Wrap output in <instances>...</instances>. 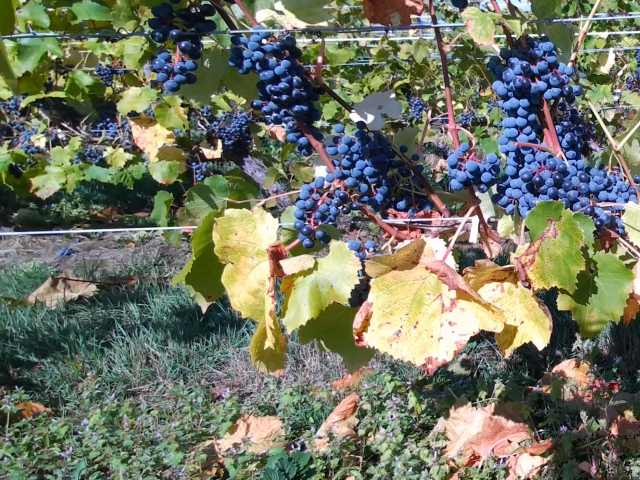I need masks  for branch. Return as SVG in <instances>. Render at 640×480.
<instances>
[{
    "label": "branch",
    "mask_w": 640,
    "mask_h": 480,
    "mask_svg": "<svg viewBox=\"0 0 640 480\" xmlns=\"http://www.w3.org/2000/svg\"><path fill=\"white\" fill-rule=\"evenodd\" d=\"M434 33L442 67V77L444 82V102L450 118V120L448 121V132L452 140L453 147L455 149H458L460 147V140L457 136V134L459 133V125L457 122V116L453 106V102L451 100V80L449 75L450 68L447 59L446 47L443 42L441 29L435 28Z\"/></svg>",
    "instance_id": "30e6481e"
},
{
    "label": "branch",
    "mask_w": 640,
    "mask_h": 480,
    "mask_svg": "<svg viewBox=\"0 0 640 480\" xmlns=\"http://www.w3.org/2000/svg\"><path fill=\"white\" fill-rule=\"evenodd\" d=\"M559 104L560 99L558 97H555L552 101L550 111L549 104L547 102H544L542 104V110L538 109L536 111L540 127L543 131L540 137V142L542 144H545L547 142L548 147L552 149L551 153L553 155H557L561 151V146L559 145V139L553 121L558 111Z\"/></svg>",
    "instance_id": "325d2c04"
},
{
    "label": "branch",
    "mask_w": 640,
    "mask_h": 480,
    "mask_svg": "<svg viewBox=\"0 0 640 480\" xmlns=\"http://www.w3.org/2000/svg\"><path fill=\"white\" fill-rule=\"evenodd\" d=\"M584 101H585V102L589 105V107L591 108L592 113H593V115H594V117H595V119H596V121H597V123H598V126H599V127L601 128V130L604 132V134H605V136H606V138H607V140H608V142H609V144H610V146H611L612 150L614 151L615 156L620 160V162H621V164H622V166H623V168H624V171L626 172V175H627V176H628V178L630 179V180H629V184H630L631 186H635V185H636V182H634V181H633V177H634V175H633V173L631 172V170H630V168H629V166H628V164H627V162H626V160H625V157H624V156H622V154L619 152V149H618V147H617V145H616L615 141L613 140L612 135L610 134L609 130L607 129V127H606V126H605V124L603 123V121H602V119H601V116L599 115L598 110H597V108H596V106H595L594 102H593L589 97H585V98H584Z\"/></svg>",
    "instance_id": "170604dd"
},
{
    "label": "branch",
    "mask_w": 640,
    "mask_h": 480,
    "mask_svg": "<svg viewBox=\"0 0 640 480\" xmlns=\"http://www.w3.org/2000/svg\"><path fill=\"white\" fill-rule=\"evenodd\" d=\"M469 191V197L472 201V204L474 206V211H475V215L478 218L481 227L484 231V233L491 239V240H495L497 243H501L503 241V238L498 235L497 233H494L490 227L489 224L486 220V217L484 216L482 209H481V203L479 202V199L477 197L476 194V188L474 186H470L468 188Z\"/></svg>",
    "instance_id": "45aa463d"
},
{
    "label": "branch",
    "mask_w": 640,
    "mask_h": 480,
    "mask_svg": "<svg viewBox=\"0 0 640 480\" xmlns=\"http://www.w3.org/2000/svg\"><path fill=\"white\" fill-rule=\"evenodd\" d=\"M413 176H419L422 179V183H420V187L423 188L429 196L431 202L438 208L440 213L444 217H450L451 212L449 208L444 204L440 196L434 191L429 182L426 180V177L421 173H416L415 169H412Z\"/></svg>",
    "instance_id": "982ccf7c"
},
{
    "label": "branch",
    "mask_w": 640,
    "mask_h": 480,
    "mask_svg": "<svg viewBox=\"0 0 640 480\" xmlns=\"http://www.w3.org/2000/svg\"><path fill=\"white\" fill-rule=\"evenodd\" d=\"M298 129L305 134V137L307 138V140L309 141V143L316 149L318 150V155L321 158V160L326 164V166L328 167V169L331 172H334L336 170V167L334 165V163L332 162V160L327 156L326 152H325V145L322 142H318L314 135L312 134L311 130L309 128H307L304 124H300L298 126Z\"/></svg>",
    "instance_id": "1ff4a987"
},
{
    "label": "branch",
    "mask_w": 640,
    "mask_h": 480,
    "mask_svg": "<svg viewBox=\"0 0 640 480\" xmlns=\"http://www.w3.org/2000/svg\"><path fill=\"white\" fill-rule=\"evenodd\" d=\"M361 211L366 214L372 221H374L378 226H380L385 231L389 232V235L396 239L399 242L405 241L407 236L401 231L397 230L393 226L387 224L382 220L379 216H377L373 211H371L366 205L361 207Z\"/></svg>",
    "instance_id": "ea751061"
},
{
    "label": "branch",
    "mask_w": 640,
    "mask_h": 480,
    "mask_svg": "<svg viewBox=\"0 0 640 480\" xmlns=\"http://www.w3.org/2000/svg\"><path fill=\"white\" fill-rule=\"evenodd\" d=\"M306 76L309 80H311L314 84H316L319 88H321L322 90H324L326 93H328L331 98L343 109H345L347 112H350L352 110V106L350 104H348L346 101H344L338 94L337 92L330 87L327 83L323 82L322 80H320L316 75H314L311 71H308L306 73Z\"/></svg>",
    "instance_id": "ca6c30ca"
},
{
    "label": "branch",
    "mask_w": 640,
    "mask_h": 480,
    "mask_svg": "<svg viewBox=\"0 0 640 480\" xmlns=\"http://www.w3.org/2000/svg\"><path fill=\"white\" fill-rule=\"evenodd\" d=\"M591 26H592L591 22H585L583 24L582 29L580 30L579 36H578L577 40L574 42V44L572 46V49L570 51V55H569V58L567 60V64L569 66H572L575 63L579 48L581 47L582 43L584 42V40H585V38L587 36V32L589 31Z\"/></svg>",
    "instance_id": "1d269e1b"
},
{
    "label": "branch",
    "mask_w": 640,
    "mask_h": 480,
    "mask_svg": "<svg viewBox=\"0 0 640 480\" xmlns=\"http://www.w3.org/2000/svg\"><path fill=\"white\" fill-rule=\"evenodd\" d=\"M211 3L213 4V6L215 7V9L217 10V12L222 16V18L226 21V24L229 26L230 29H237V25L236 22L230 17V15L225 11V9L222 7L221 3L219 2V0H211Z\"/></svg>",
    "instance_id": "1af6ec82"
},
{
    "label": "branch",
    "mask_w": 640,
    "mask_h": 480,
    "mask_svg": "<svg viewBox=\"0 0 640 480\" xmlns=\"http://www.w3.org/2000/svg\"><path fill=\"white\" fill-rule=\"evenodd\" d=\"M237 7L239 8V10L246 16V18L254 25L257 26L259 24L258 19L248 10V8L245 6L244 2L242 0H238L236 2Z\"/></svg>",
    "instance_id": "2b1400db"
},
{
    "label": "branch",
    "mask_w": 640,
    "mask_h": 480,
    "mask_svg": "<svg viewBox=\"0 0 640 480\" xmlns=\"http://www.w3.org/2000/svg\"><path fill=\"white\" fill-rule=\"evenodd\" d=\"M501 29H502V31L504 33L505 39H506L509 47L511 49H514L516 47V43H515V40L513 39V36L511 34V31H510L509 27L506 24H503L501 26Z\"/></svg>",
    "instance_id": "8bde2521"
},
{
    "label": "branch",
    "mask_w": 640,
    "mask_h": 480,
    "mask_svg": "<svg viewBox=\"0 0 640 480\" xmlns=\"http://www.w3.org/2000/svg\"><path fill=\"white\" fill-rule=\"evenodd\" d=\"M426 5L429 11V17H430L431 23H438V17L436 14V9H435L433 0H426Z\"/></svg>",
    "instance_id": "a944a4c4"
},
{
    "label": "branch",
    "mask_w": 640,
    "mask_h": 480,
    "mask_svg": "<svg viewBox=\"0 0 640 480\" xmlns=\"http://www.w3.org/2000/svg\"><path fill=\"white\" fill-rule=\"evenodd\" d=\"M602 4H603V0H596L593 7L590 9L588 13V17H595V15L599 11Z\"/></svg>",
    "instance_id": "afce2bb1"
}]
</instances>
